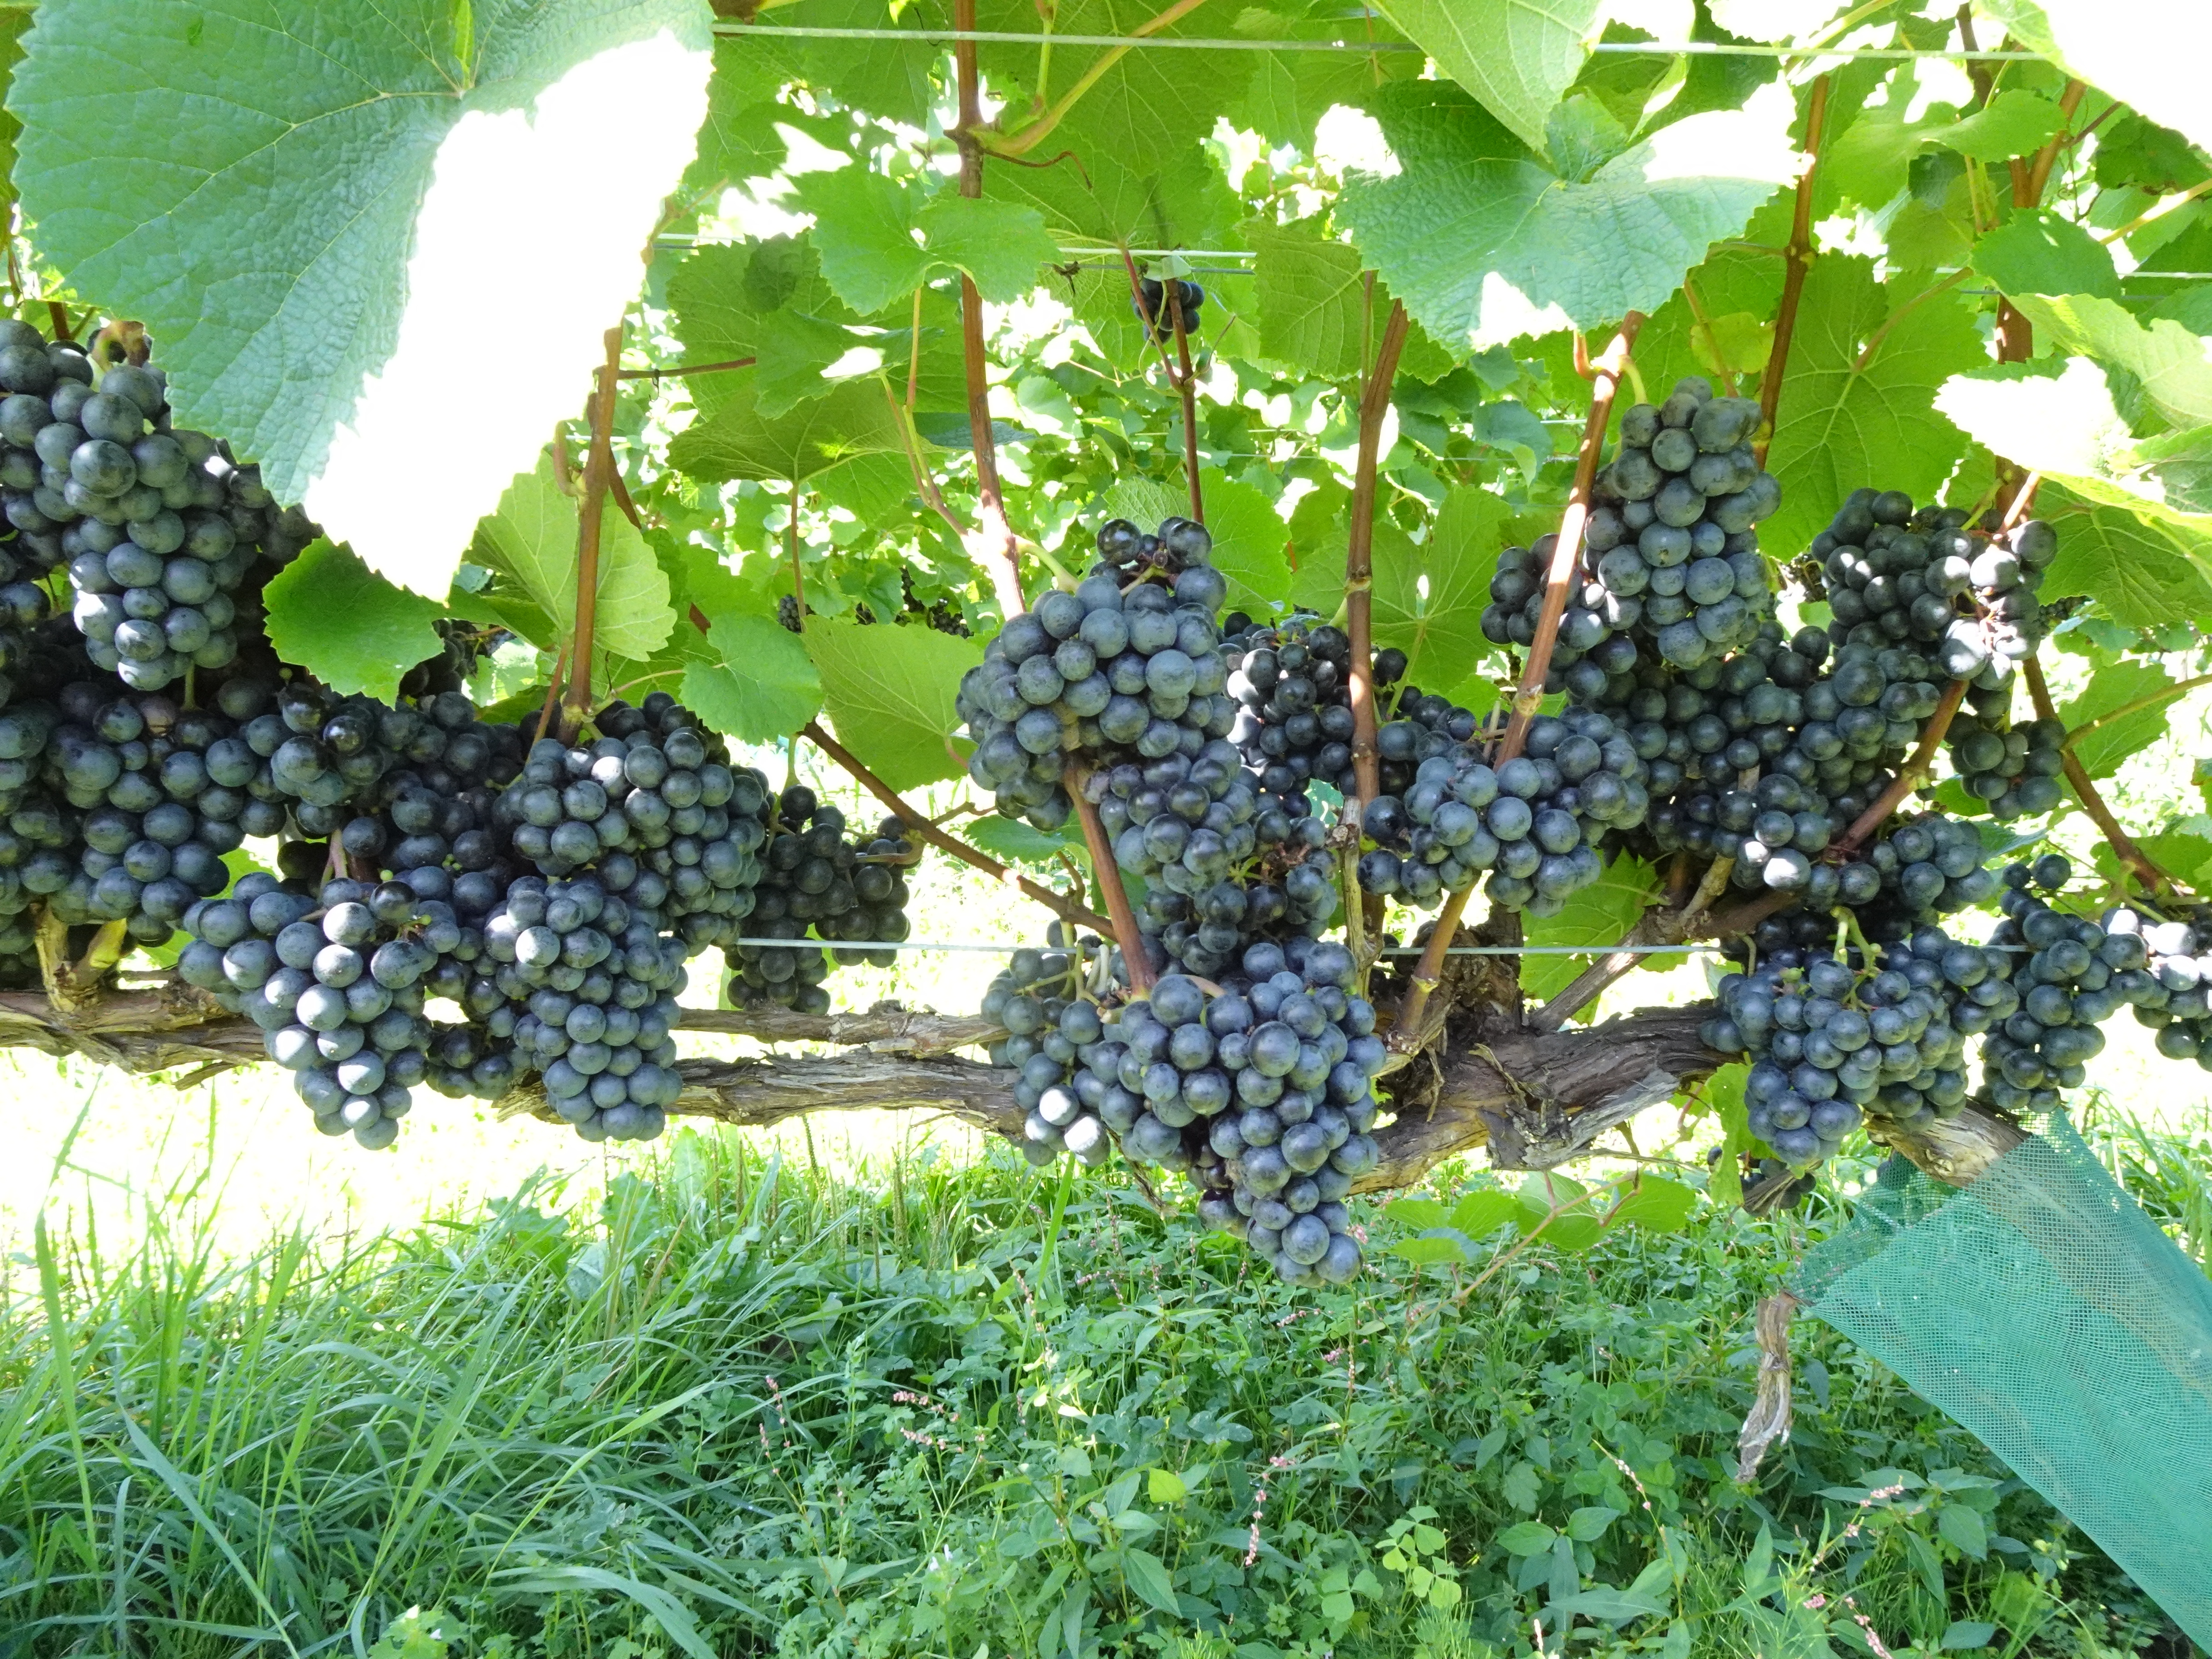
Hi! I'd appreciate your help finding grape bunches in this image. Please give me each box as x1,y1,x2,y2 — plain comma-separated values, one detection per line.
1723,882,1916,949
1095,933,1389,1287
227,461,327,560
2,317,94,624
2,674,79,986
723,786,855,1015
1481,534,1638,710
1719,939,1954,1164
51,673,288,946
379,692,562,1098
1874,926,2020,1138
958,515,1282,972
512,693,766,952
1357,707,1653,913
1589,623,1831,863
271,616,461,853
1976,857,2158,1112
1814,487,2004,660
483,874,688,1141
983,918,1112,1165
815,817,922,968
34,365,320,691
1225,613,1484,927
2136,895,2212,1074
179,841,457,1151
1583,376,1784,668
1944,682,2069,821
1749,649,1994,915
1911,522,2057,692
